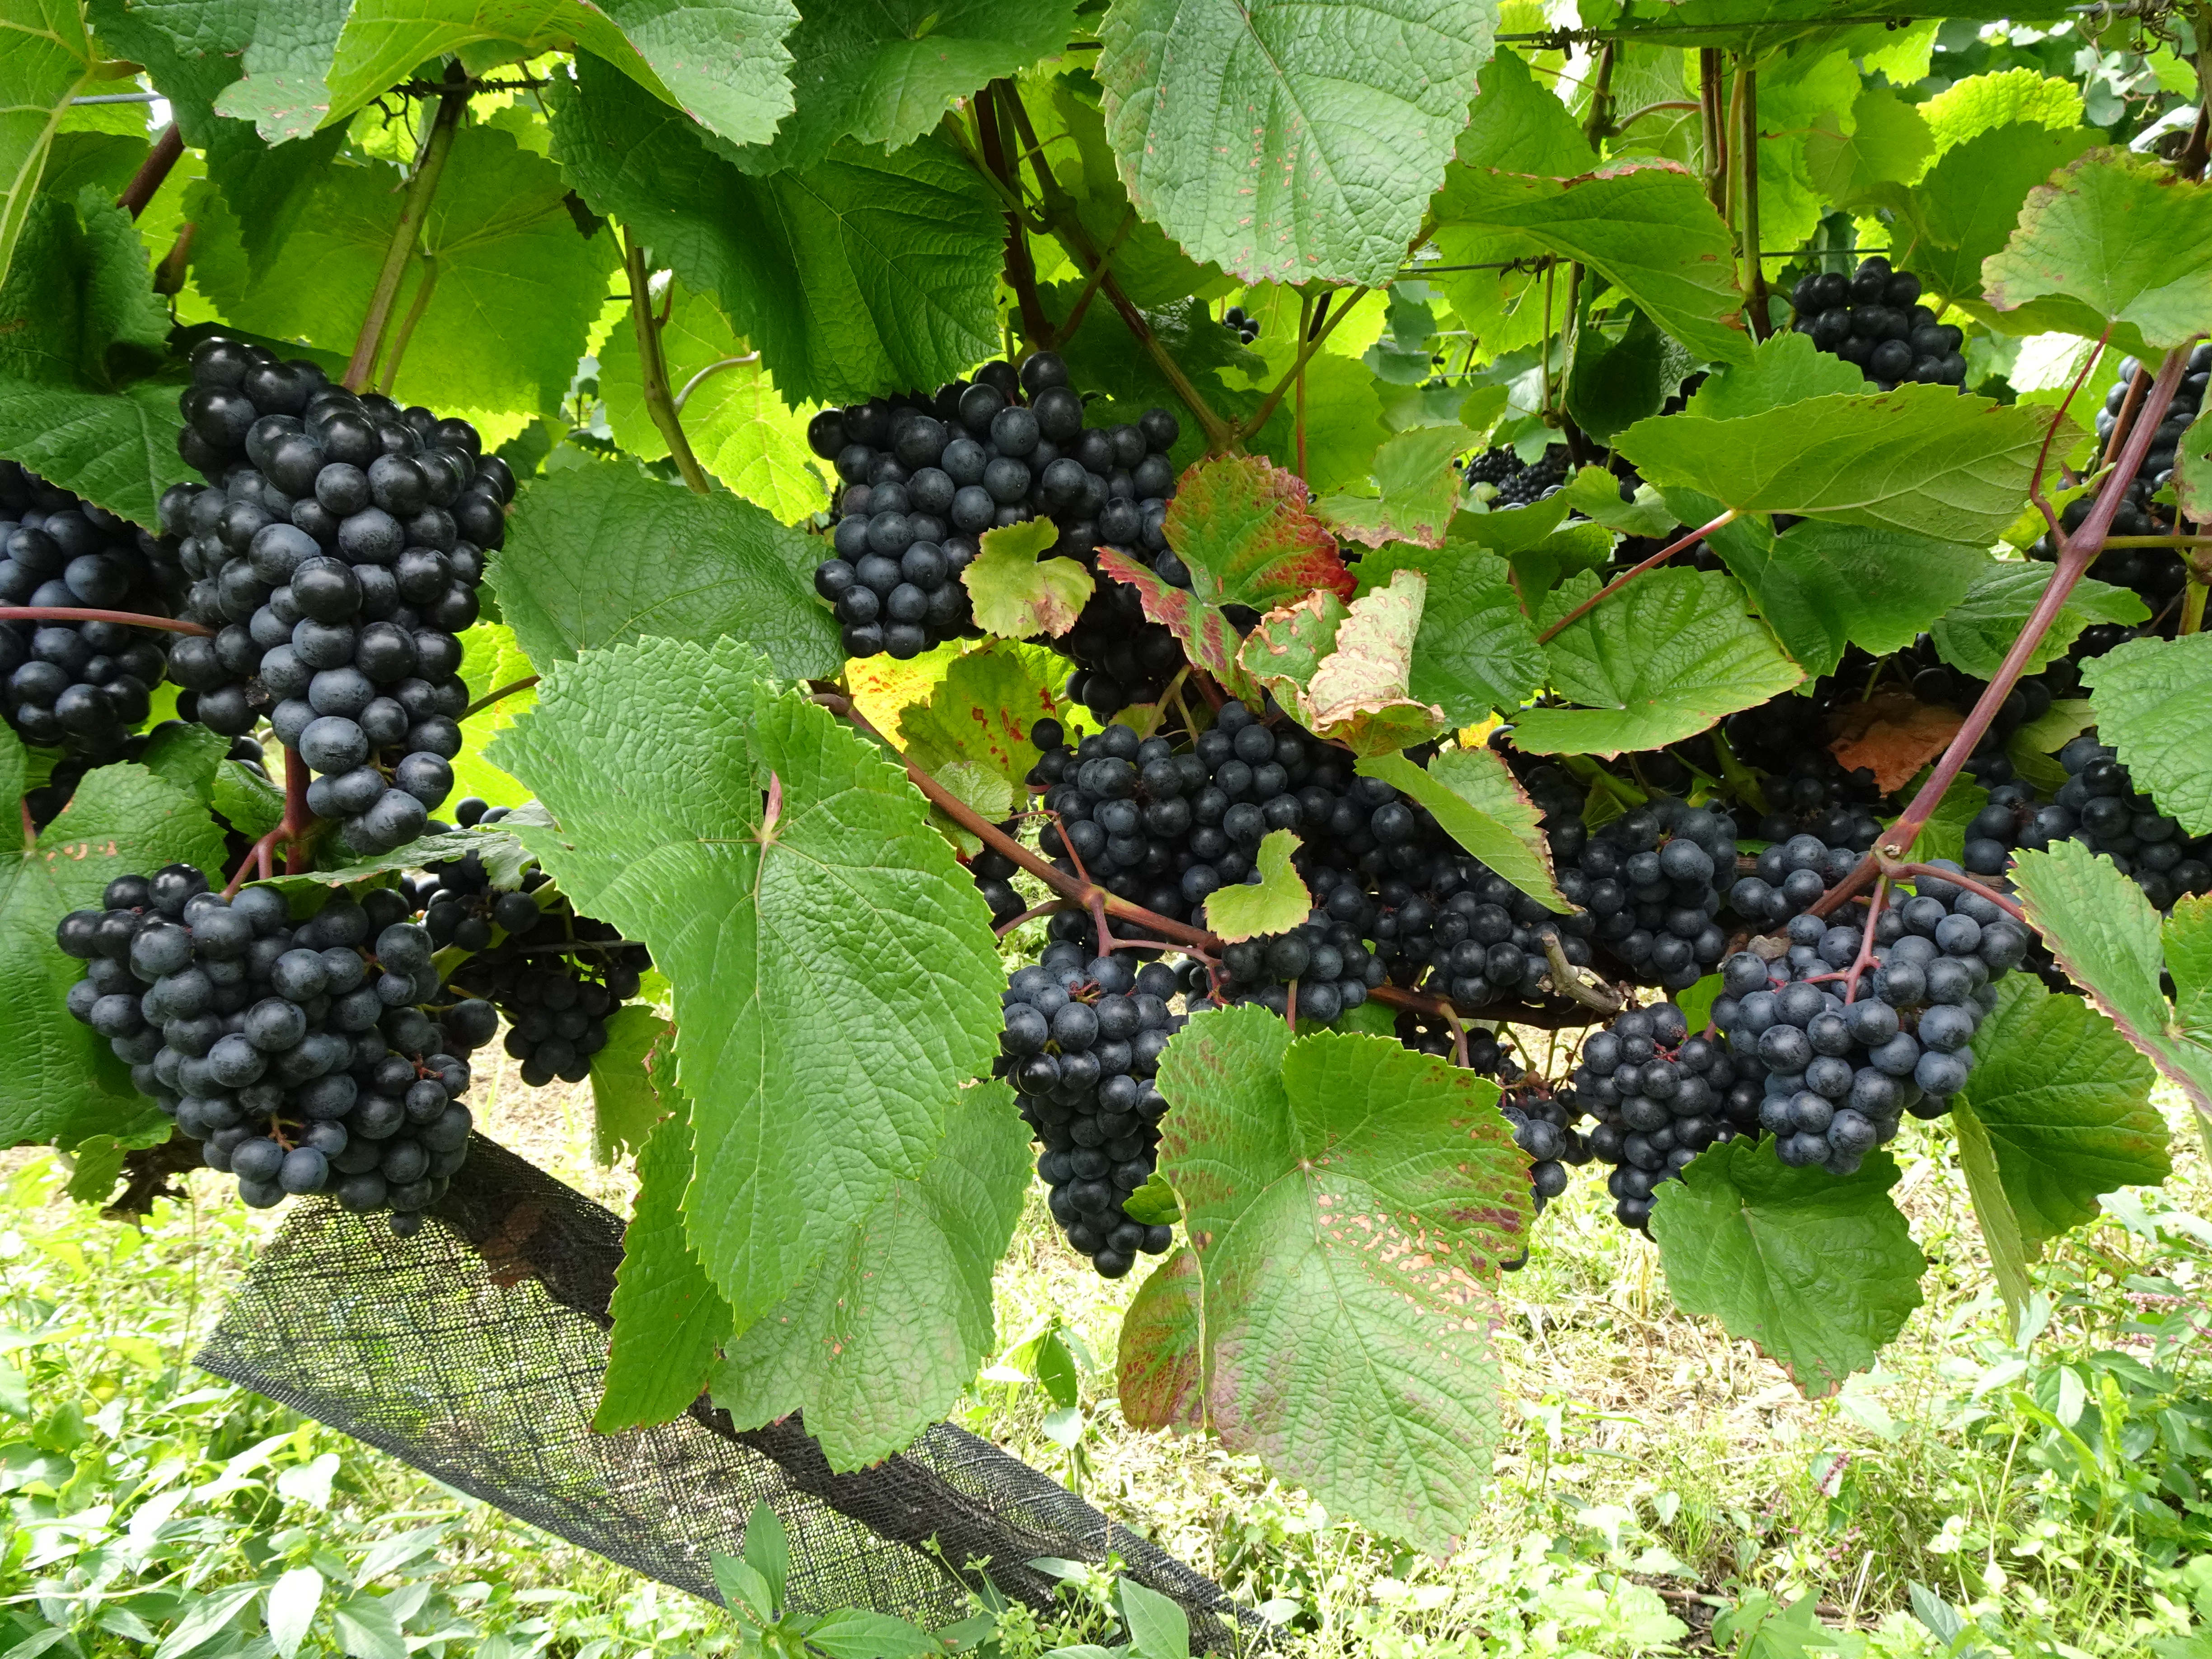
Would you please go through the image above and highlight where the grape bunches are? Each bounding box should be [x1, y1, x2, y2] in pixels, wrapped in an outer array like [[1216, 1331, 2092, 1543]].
[[417, 798, 553, 954], [1661, 370, 1711, 417], [1394, 1007, 1509, 1074], [55, 863, 432, 1208], [1493, 1059, 1594, 1273], [807, 352, 1104, 656], [1755, 747, 1907, 852], [330, 998, 498, 1237], [1956, 751, 2075, 878], [1, 463, 193, 751], [1495, 473, 1649, 521], [1733, 640, 1880, 755], [1711, 834, 2033, 1174], [974, 939, 1189, 1280], [966, 806, 1028, 935], [1047, 587, 1199, 728], [1427, 765, 1595, 1009], [2057, 728, 2212, 909], [161, 336, 326, 734], [1683, 522, 1723, 569], [1561, 797, 1734, 989], [22, 721, 270, 846], [1025, 717, 1206, 962], [1793, 256, 1968, 396], [2098, 339, 2212, 499], [1179, 695, 1305, 927], [1884, 626, 2076, 753], [496, 942, 654, 1087], [2033, 491, 2205, 685], [190, 387, 517, 857], [1288, 723, 1469, 992], [1222, 907, 1388, 1040], [1575, 1001, 1732, 1246], [1043, 408, 1191, 588], [1488, 694, 1724, 799]]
